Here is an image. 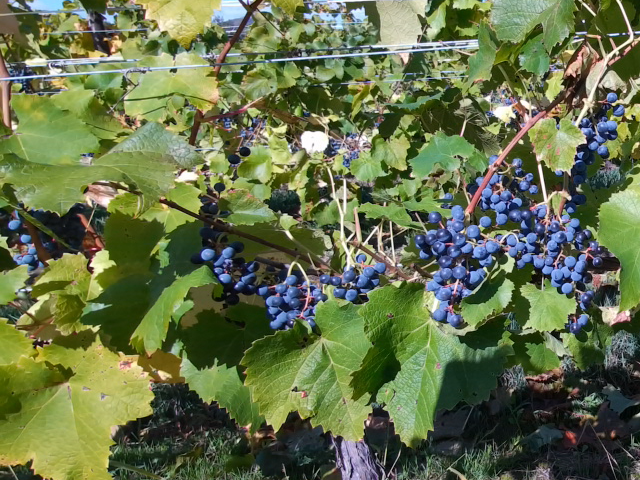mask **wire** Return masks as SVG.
<instances>
[{
  "label": "wire",
  "mask_w": 640,
  "mask_h": 480,
  "mask_svg": "<svg viewBox=\"0 0 640 480\" xmlns=\"http://www.w3.org/2000/svg\"><path fill=\"white\" fill-rule=\"evenodd\" d=\"M478 39L470 40H430L424 43H369L363 45H343V46H323V47H295V48H276L265 51H252L245 53H231L227 52L226 56L229 58H247L254 56H267L279 53H297V52H318L316 55L311 56H298L292 58H258L252 61H224L215 64H181L178 66L172 65H153L133 68H122L114 70H85L75 71L70 73H46L42 75H12L10 77H0V81H14V80H44L48 78H72L77 76L88 75H116L124 73H135L155 70H170L180 71L184 69H217L226 66H254L261 63H295L300 61H313V60H336L341 58H364V57H379L390 54H419L422 52H442L448 50H472L479 48ZM371 48H417V49H388L377 52H362V53H339L333 55H322L321 53L326 51H345V50H365Z\"/></svg>",
  "instance_id": "1"
},
{
  "label": "wire",
  "mask_w": 640,
  "mask_h": 480,
  "mask_svg": "<svg viewBox=\"0 0 640 480\" xmlns=\"http://www.w3.org/2000/svg\"><path fill=\"white\" fill-rule=\"evenodd\" d=\"M136 58H117V59H97L90 61H53V62H41V63H29L23 66L24 70L32 69V68H43V67H55V66H67V67H77V66H92V65H100V64H119V63H136Z\"/></svg>",
  "instance_id": "2"
}]
</instances>
